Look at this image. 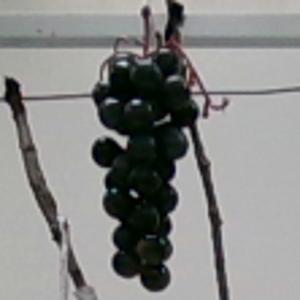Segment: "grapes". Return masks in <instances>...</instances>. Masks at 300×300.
<instances>
[{
	"label": "grapes",
	"mask_w": 300,
	"mask_h": 300,
	"mask_svg": "<svg viewBox=\"0 0 300 300\" xmlns=\"http://www.w3.org/2000/svg\"><path fill=\"white\" fill-rule=\"evenodd\" d=\"M186 78L181 51L162 48L149 56L120 51L108 63L107 79L94 87L92 100L103 127L128 137L126 148L101 136L91 146L96 165L109 168L104 211L119 221L111 234L118 249L111 259L116 276L139 275L143 288L154 293L168 289L172 272L164 262L173 253L167 236L173 229L169 215L179 194L170 182L175 161L185 157L189 139L184 130L197 123L198 103Z\"/></svg>",
	"instance_id": "1"
}]
</instances>
